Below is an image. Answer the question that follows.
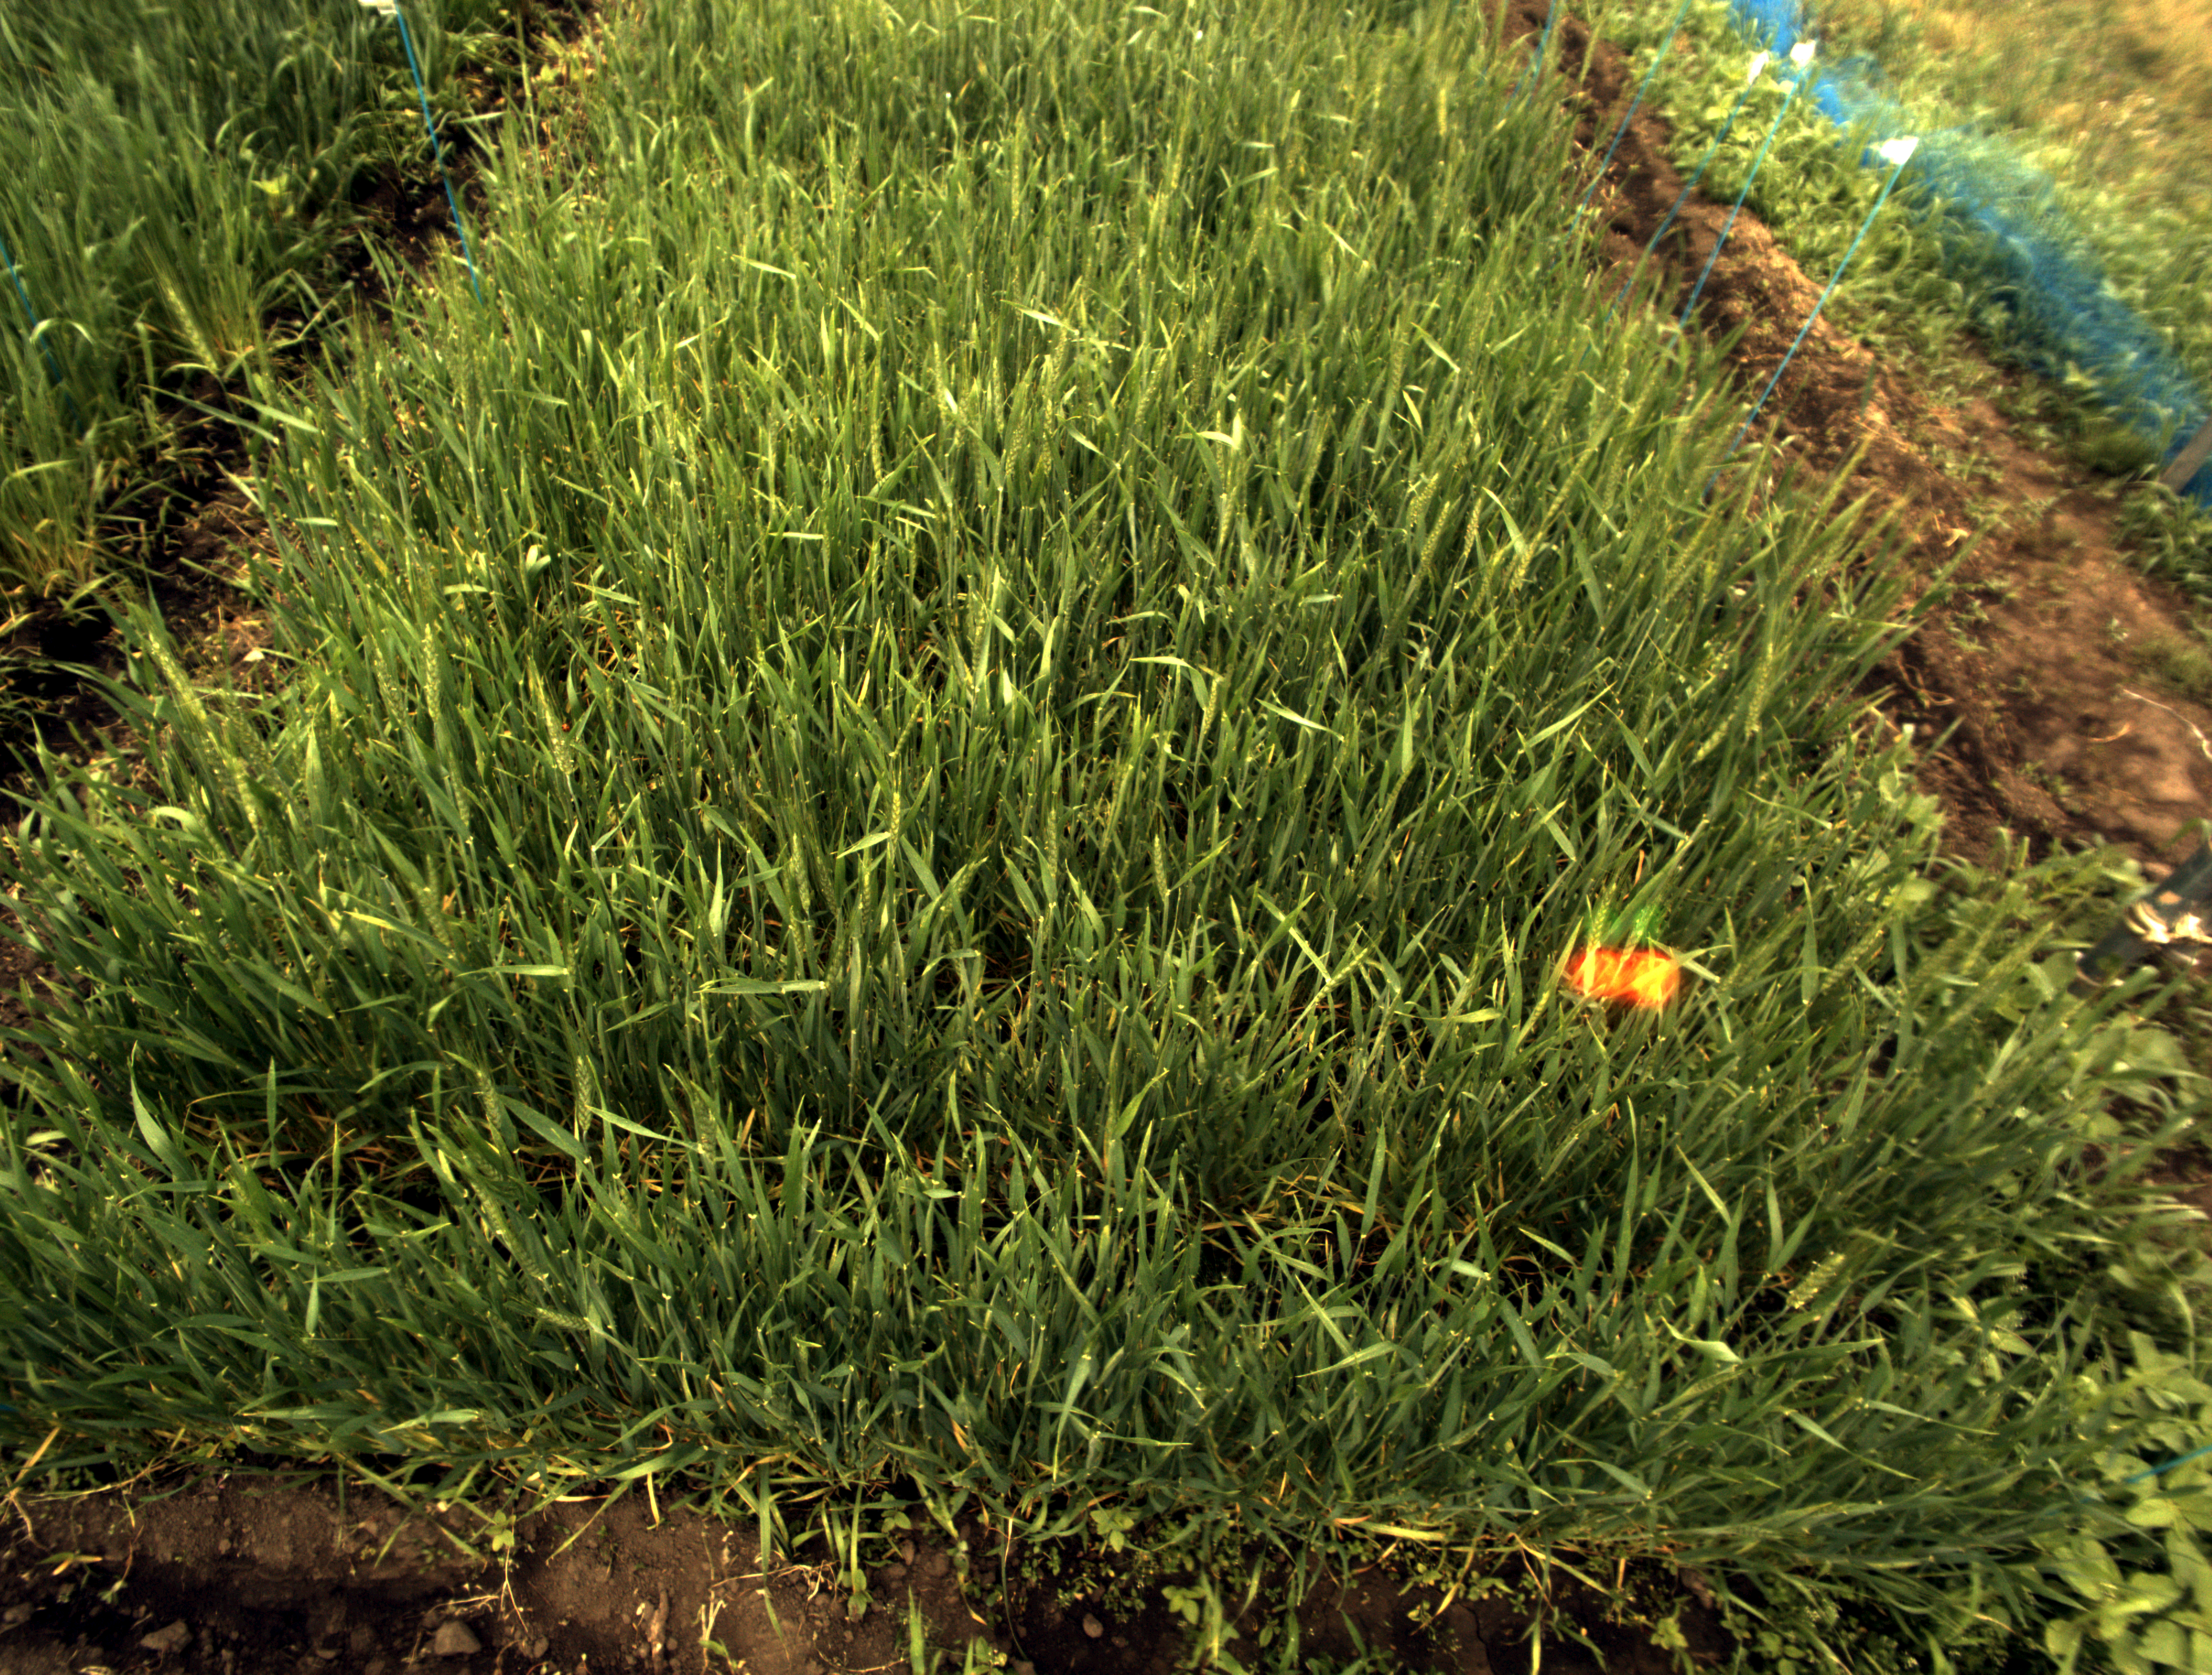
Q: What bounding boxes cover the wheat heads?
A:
[1713,960,1741,1002]
[1794,504,1809,546]
[1545,10,1561,74]
[907,529,918,574]
[1214,408,1224,481]
[1465,293,1492,375]
[1547,449,1589,514]
[1091,507,1098,542]
[1530,989,1550,1029]
[1159,189,1169,254]
[519,554,533,602]
[636,338,646,395]
[1436,87,1448,133]
[991,355,1005,435]
[1445,671,1467,721]
[838,48,849,86]
[1645,1042,1657,1077]
[1491,624,1523,678]
[1377,992,1400,1041]
[1976,918,2057,990]
[1223,301,1233,344]
[952,377,969,451]
[188,801,230,861]
[459,321,481,440]
[1970,1054,2029,1100]
[769,116,790,153]
[1011,147,1021,216]
[790,827,812,912]
[1332,731,1349,775]
[386,374,407,417]
[1295,771,1306,808]
[1660,550,1708,604]
[1183,260,1196,309]
[896,429,904,459]
[1388,763,1413,806]
[1929,512,1997,593]
[1171,121,1187,190]
[1081,255,1091,302]
[1580,25,1603,81]
[424,851,441,910]
[937,251,946,281]
[1111,761,1127,811]
[1620,901,1658,963]
[1675,384,1712,442]
[229,756,259,830]
[1825,1602,1838,1626]
[1692,713,1736,767]
[456,279,477,328]
[503,135,517,191]
[1809,521,1857,588]
[1711,509,1739,581]
[1043,398,1053,478]
[1419,500,1449,570]
[1464,0,1476,40]
[636,587,649,628]
[1685,1369,1740,1397]
[466,1149,506,1184]
[792,410,798,445]
[1038,1,1047,52]
[484,1307,512,1333]
[1349,41,1358,82]
[602,682,615,720]
[1202,676,1217,731]
[972,600,989,673]
[668,677,678,718]
[752,509,768,557]
[310,376,331,443]
[416,562,432,619]
[224,687,282,782]
[1101,117,1106,152]
[1728,1522,1782,1542]
[691,1095,717,1164]
[1959,917,1998,976]
[1382,602,1404,655]
[502,1224,543,1277]
[1903,929,1969,990]
[1616,358,1627,414]
[1204,990,1216,1042]
[870,411,882,483]
[1604,1367,1627,1402]
[565,391,580,438]
[199,734,236,801]
[1440,165,1454,203]
[1292,308,1303,372]
[1592,368,1619,435]
[787,917,806,955]
[165,284,219,374]
[1585,882,1617,962]
[857,338,864,384]
[1757,930,1791,968]
[1785,1252,1846,1308]
[1154,831,1166,901]
[1636,690,1654,747]
[332,507,354,553]
[1561,119,1576,169]
[261,366,280,413]
[1784,548,1821,598]
[819,520,832,560]
[299,1334,328,1360]
[1243,223,1264,271]
[856,257,868,309]
[894,702,918,759]
[1776,1090,1809,1118]
[1163,360,1178,429]
[1465,950,1482,999]
[875,291,886,328]
[1413,415,1436,480]
[1151,524,1161,575]
[1106,305,1115,347]
[1843,511,1895,572]
[754,632,767,669]
[1650,468,1669,505]
[1104,1095,1117,1144]
[1351,403,1369,445]
[976,258,981,291]
[1942,979,1998,1034]
[436,323,461,387]
[853,1241,864,1281]
[355,333,371,440]
[593,448,600,467]
[473,347,498,422]
[912,450,916,480]
[1744,435,1771,509]
[1462,498,1481,557]
[1828,1385,1864,1420]
[1394,326,1408,389]
[1285,141,1300,173]
[769,405,778,455]
[617,1183,640,1222]
[970,420,983,482]
[373,645,407,723]
[1315,947,1368,1005]
[1664,521,1709,582]
[673,346,682,395]
[1411,472,1437,527]
[410,881,453,950]
[1046,318,1069,400]
[1556,1121,1588,1157]
[1092,574,1103,610]
[1614,556,1633,591]
[1370,209,1388,263]
[939,859,975,922]
[728,476,740,522]
[1817,452,1862,515]
[712,528,716,561]
[867,252,877,307]
[1209,286,1235,350]
[1249,505,1264,546]
[1045,805,1058,880]
[933,497,946,552]
[827,130,841,203]
[889,789,900,859]
[575,1053,593,1130]
[797,1341,809,1365]
[826,938,844,989]
[1453,406,1483,467]
[475,1068,502,1130]
[534,1304,591,1330]
[1064,575,1077,622]
[1501,551,1520,587]
[1290,0,1308,52]
[1327,213,1344,263]
[814,853,840,916]
[1190,352,1205,406]
[948,928,963,976]
[231,1175,270,1245]
[469,1178,506,1234]
[1628,365,1662,430]
[1079,374,1093,427]
[1298,433,1323,505]
[932,339,949,423]
[687,424,696,481]
[1740,941,1765,978]
[424,622,440,722]
[1471,551,1498,616]
[446,748,471,827]
[292,738,309,789]
[1005,408,1026,478]
[1775,525,1814,585]
[992,0,1001,33]
[1012,263,1022,321]
[672,539,687,562]
[965,199,973,252]
[861,869,871,933]
[314,711,334,782]
[663,402,679,456]
[761,176,774,240]
[782,873,794,904]
[1811,1503,1860,1517]
[1238,449,1246,516]
[1742,643,1775,738]
[581,203,593,252]
[1602,442,1623,511]
[1626,492,1644,529]
[788,195,800,259]
[1137,352,1168,424]
[1817,919,1884,990]
[1682,420,1734,506]
[776,702,797,754]
[566,940,576,986]
[845,135,861,192]
[695,902,720,953]
[1221,482,1240,545]
[1057,99,1068,136]
[1510,531,1545,592]
[837,619,843,649]
[544,705,574,777]
[148,630,210,726]
[1128,198,1139,263]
